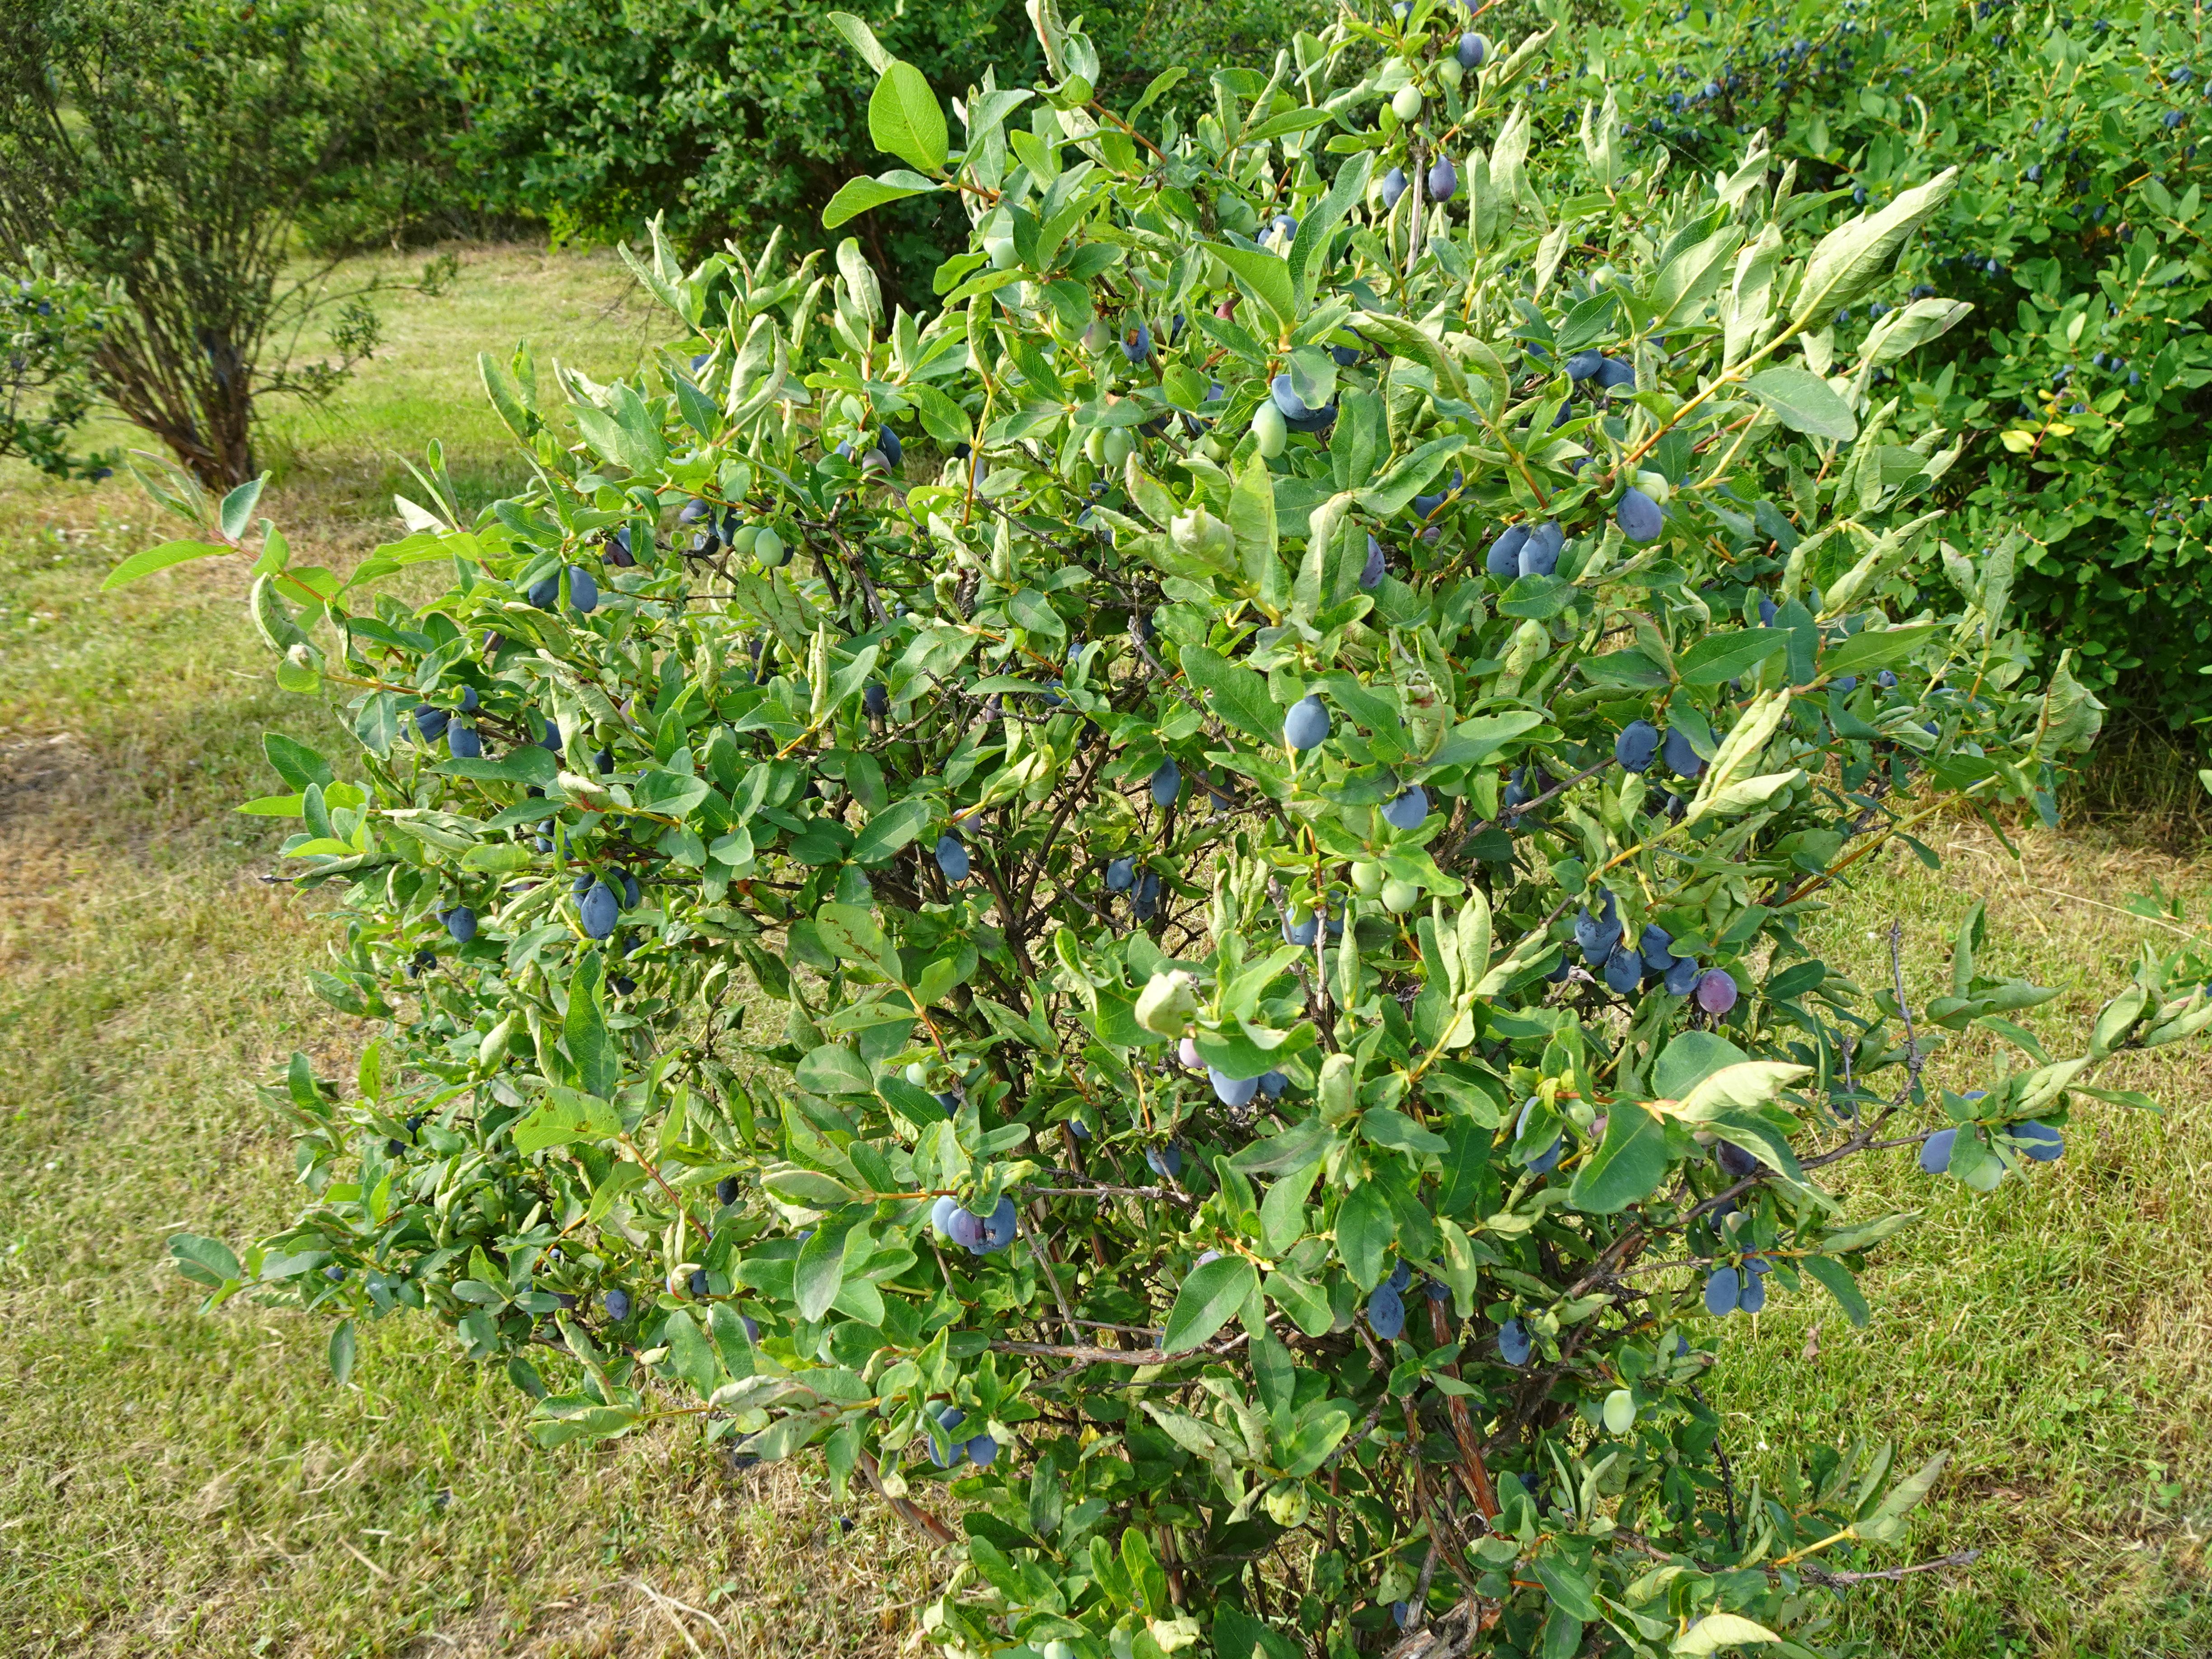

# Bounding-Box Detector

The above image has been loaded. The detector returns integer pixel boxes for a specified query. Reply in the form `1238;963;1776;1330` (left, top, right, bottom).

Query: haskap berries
1704;1268;1748;1316
1575;856;1581;861
1391;84;1424;126
1552;400;1571;428
603;1288;631;1321
562;565;601;612
1108;856;1136;891
534;718;563;749
689;1269;709;1297
1207;385;1224;402
1633;469;1668;504
326;1265;346;1282
593;747;613;775
1503;781;1531;808
1054;1636;1070;1646
1154;1325;1167;1350
1323;889;1352;932
715;1173;738;1205
862;449;892;487
706;1298;741;1326
928;1404;961;1467
1557;350;1602;376
1796;741;1813;767
1740;1244;1778;1271
581;882;618;940
1664;956;1699;997
1069;397;1083;430
1839;676;1856;693
1080;318;1111;352
484;629;506;651
949;1204;985;1250
993;238;1022;270
1692;1130;1718;1144
436;900;460;924
523;564;562;608
1511;766;1539;789
1664;721;1703;782
1730;1265;1772;1316
1455;32;1486;68
1259;1069;1289;1098
1003;661;1013;675
1216;298;1242;323
1070;1118;1093;1139
1210;378;1223;389
1933;720;1942;730
1274;215;1298;242
1696;968;1736;1013
1602;1389;1638;1437
1333;327;1357;364
1638;923;1676;969
1187;413;1213;434
918;1398;946;1432
535;819;556;854
781;544;794;567
1517;616;1550;661
1918;1126;1968;1177
1259;227;1271;248
1718;1140;1759;1176
387;1138;406;1156
1926;687;1953;699
1028;1638;1053;1654
934;1090;960;1118
877;424;901;466
1962;1091;1988;1101
511;881;536;893
1667;793;1684;817
605;867;641;912
1138;414;1167;438
1103;429;1138;468
695;531;718;554
755;525;784;570
1835;1101;1856;1120
1679;476;1691;486
641;770;646;777
1068;641;1085;663
1730;676;1745;692
1569;1098;1597;1127
1489;872;1506;890
1571;393;1583;405
473;607;493;617
1769;785;1792;811
1498;1318;1533;1367
1468;817;1483;831
613;526;655;558
1084;424;1112;465
1078;495;1093;507
1449;469;1470;494
895;601;914;619
1519;1470;1542;1493
928;1191;962;1244
988;695;1002;721
1076;717;1101;751
1350;848;1385;895
446;720;480;764
1077;507;1097;524
1089;483;1129;513
1278;692;1333;750
1614;718;1660;775
717;499;743;546
1583;946;1612;969
1415;490;1448;518
1195;1251;1221;1271
601;554;613;564
1152;755;1181;804
1043;1640;1073;1658
413;703;450;745
1708;1200;1737;1233
1668;1335;1689;1358
1210;1067;1257;1107
774;636;793;663
1428;157;1458;202
1528;340;1548;358
1381;166;1408;209
1053;308;1089;341
453;686;480;710
551;1290;578;1310
1517;1096;1559;1173
934;835;972;880
691;354;711;371
1210;784;1235;811
1594;357;1635;403
1250;403;1292;463
1965;742;1985;759
1129;893;1156;919
1285;907;1320;946
1923;720;1938;738
1285;403;1336;434
1105;529;1115;545
604;541;632;568
1386;1256;1411;1288
1614;356;1633;372
522;1284;534;1315
1969;780;1985;788
1726;1212;1746;1232
1363;1273;1404;1339
1957;747;1967;755
751;639;765;660
836;440;855;462
1130;863;1161;902
1607;933;1643;995
1574;458;1595;473
1152;315;1175;333
1878;670;1898;687
797;1229;815;1243
1382;868;1418;917
1394;1599;1411;1627
709;514;718;537
953;808;980;834
866;685;890;715
406;950;436;980
1758;596;1780;627
408;1117;422;1144
553;832;575;861
1420;1255;1451;1301
2011;1118;2067;1159
985;1198;1018;1245
748;669;765;687
1573;884;1624;948
1145;1140;1182;1178
1179;1037;1205;1067
450;905;479;944
612;935;643;995
970;1239;994;1255
1808;586;1823;613
968;449;991;489
739;1316;758;1346
1381;780;1430;831
1356;534;1385;589
1110;1624;1132;1659
1506;815;1521;830
1790;737;1802;755
1119;315;1156;362
1042;680;1065;706
1964;1151;2002;1191
1615;491;1664;544
1486;519;1535;576
732;525;768;555
1537;768;1556;793
1269;375;1321;421
1544;952;1571;983
1590;1115;1610;1138
677;499;709;523
1142;614;1157;640
543;1249;562;1272
1192;769;1208;796
970;1424;998;1466
906;1059;932;1087
1413;526;1443;546
1783;763;1806;790
1100;481;1110;487
1172;314;1186;332
1517;524;1564;576
945;828;961;845
619;699;646;725
1649;337;1663;346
